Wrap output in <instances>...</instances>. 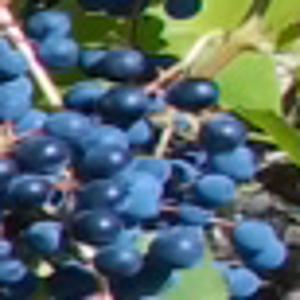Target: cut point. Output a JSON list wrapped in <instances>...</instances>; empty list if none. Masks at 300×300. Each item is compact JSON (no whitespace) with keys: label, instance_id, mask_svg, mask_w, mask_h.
<instances>
[{"label":"cut point","instance_id":"1","mask_svg":"<svg viewBox=\"0 0 300 300\" xmlns=\"http://www.w3.org/2000/svg\"><path fill=\"white\" fill-rule=\"evenodd\" d=\"M226 30L227 29H213L208 31L204 35L198 37L193 42L190 49L181 58H179L173 66L169 67L168 69H165V72L178 73L179 71H181L197 56V54L203 46L209 44L215 39L224 38Z\"/></svg>","mask_w":300,"mask_h":300}]
</instances>
